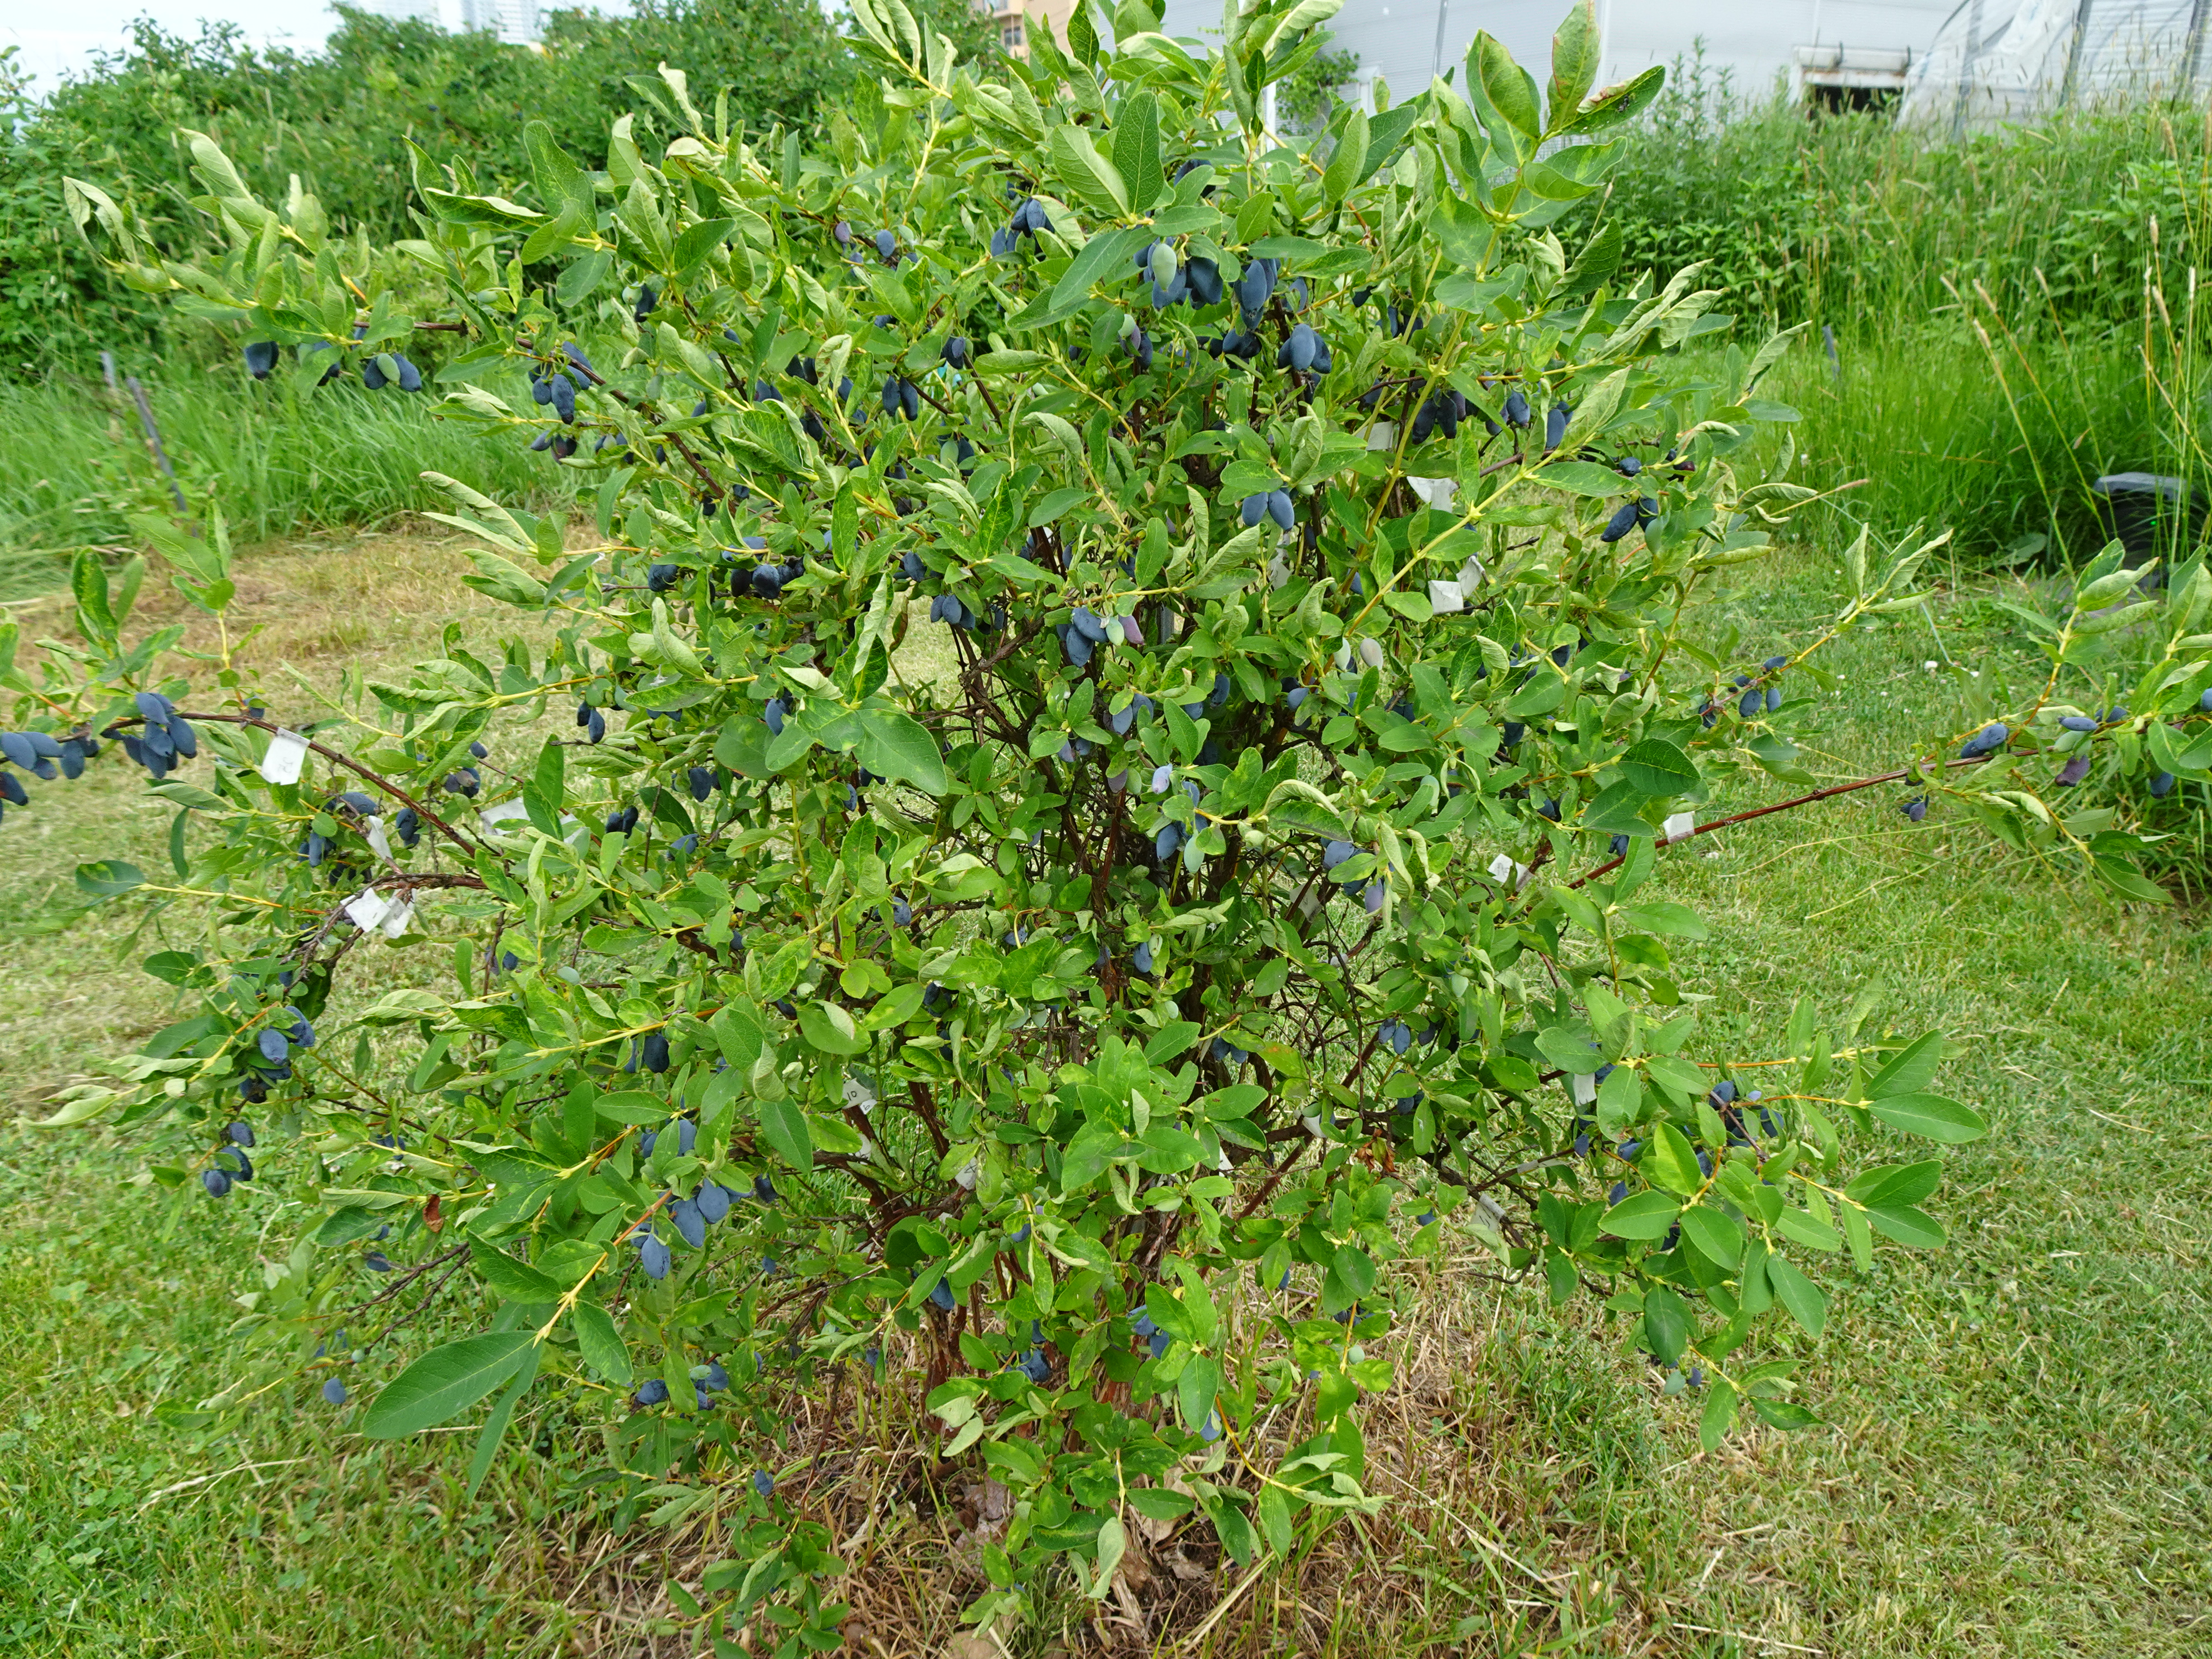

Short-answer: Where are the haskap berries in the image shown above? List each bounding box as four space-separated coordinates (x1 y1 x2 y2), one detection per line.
1033 382 1052 396
1762 656 1787 674
1552 643 1570 666
1193 815 1211 833
777 700 790 714
638 1380 665 1404
1102 1272 1116 1292
604 433 618 451
707 656 713 661
1438 396 1459 437
1107 766 1127 795
1280 678 1297 691
1608 842 1616 853
393 1136 404 1160
1447 770 1460 796
693 1380 706 1393
666 711 681 719
861 766 872 786
1610 1182 1629 1207
71 727 95 756
1760 1109 1785 1137
2151 771 2173 791
503 948 518 969
1153 268 1184 310
873 775 889 785
1120 318 1143 359
1595 1078 1606 1084
283 1112 301 1141
1507 391 1529 424
873 315 897 328
1239 305 1263 330
1128 767 1142 798
716 1056 730 1072
550 374 574 424
228 1122 255 1147
577 701 591 728
1419 1211 1441 1225
1767 689 1781 713
1127 1306 1154 1335
957 439 974 475
564 433 577 456
1725 1110 1743 1131
1097 947 1110 964
991 226 1006 254
301 1108 313 1125
1331 953 1352 967
1288 275 1311 312
1059 739 1080 766
1321 836 1332 845
1574 1134 1590 1156
1004 928 1027 945
1184 260 1194 288
728 1193 740 1203
754 1174 776 1202
761 1255 776 1275
456 1175 471 1186
1667 461 1695 482
922 981 942 1008
611 704 623 711
1617 835 1629 856
843 784 856 812
692 453 701 460
648 566 666 591
456 770 479 786
1510 660 1518 665
417 755 422 761
1464 803 1481 840
1478 667 1487 678
770 1587 777 1593
1620 1143 1642 1161
850 411 866 426
1619 671 1636 681
1189 288 1206 309
1546 408 1565 450
1240 490 1268 531
850 252 864 262
1203 740 1218 764
1302 522 1317 548
622 805 638 832
315 1347 325 1357
1905 778 1925 786
699 498 716 515
1345 420 1353 428
1196 323 1213 346
1014 1585 1025 1593
1224 352 1249 371
641 1128 652 1147
310 830 335 868
245 342 271 379
723 323 741 345
1394 1024 1410 1053
367 1260 392 1270
1557 402 1571 424
2073 737 2091 760
1289 323 1315 371
629 1218 657 1246
220 1170 231 1192
1239 332 1263 356
1011 197 1032 229
145 723 173 758
532 376 551 406
299 342 313 367
1205 419 1226 431
779 566 794 584
942 741 952 754
1360 638 1382 671
849 459 862 467
1684 1126 1691 1135
1064 934 1073 943
863 600 872 611
1146 211 1151 217
1645 516 1661 554
1960 742 1987 759
1023 229 1033 239
645 710 663 720
1046 1004 1062 1012
551 435 567 465
1244 831 1267 848
938 1029 952 1061
977 623 991 635
958 416 972 435
1001 1069 1011 1078
905 553 927 580
1580 626 1592 649
1189 254 1222 304
889 464 906 478
754 622 768 630
645 373 664 400
1406 377 1429 392
317 341 339 376
1337 712 1348 718
553 965 581 985
166 715 197 755
1418 1022 1435 1045
1600 501 1638 542
1103 710 1112 727
1412 400 1436 445
2 735 32 770
183 753 197 759
377 1135 384 1146
1030 1323 1046 1345
1152 243 1177 290
398 354 422 391
330 863 355 884
1148 243 1154 277
123 735 144 766
1486 406 1507 436
1203 1411 1222 1441
959 610 976 630
1468 1030 1480 1043
988 605 1004 631
691 1185 701 1201
259 1065 292 1080
1241 261 1268 314
1034 243 1047 261
1910 803 1926 822
1174 1123 1181 1130
778 999 800 1019
562 342 591 366
930 596 944 621
396 809 416 840
1081 417 1094 442
257 1073 276 1090
1747 1090 1762 1102
643 1031 669 1075
869 909 883 922
1260 259 1274 302
782 690 793 705
372 1252 387 1257
1309 678 1316 684
668 834 698 857
1444 392 1465 422
1148 934 1162 956
941 437 960 467
233 974 245 979
257 991 267 1002
1221 326 1249 352
1152 764 1173 793
241 1077 267 1104
1649 1354 1663 1366
658 1187 679 1213
721 537 771 560
1319 1111 1337 1125
383 1133 394 1148
595 435 609 456
800 418 809 432
1480 371 1496 389
1134 243 1149 268
1358 1308 1375 1317
1345 569 1366 594
1164 1001 1178 1019
900 379 921 421
644 1133 658 1159
838 376 856 400
674 767 689 794
1404 704 1414 719
624 1039 644 1074
1739 690 1762 717
344 789 379 815
980 1066 989 1085
1732 1122 1746 1136
792 481 801 488
1504 723 1518 734
487 946 504 977
1388 863 1394 871
1020 548 1029 560
1578 1106 1596 1129
2095 706 2130 722
698 1392 716 1410
867 1347 884 1365
1293 716 1311 731
931 571 942 575
1150 1331 1170 1360
531 430 552 451
1268 258 1278 286
2052 730 2087 753
564 366 591 389
287 1006 316 1047
1698 705 1716 727
1304 372 1320 402
60 738 83 779
1056 624 1071 639
1380 414 1390 421
1618 1136 1641 1152
1535 716 1556 734
1010 1005 1030 1029
1526 655 1538 677
1119 614 1145 646
470 742 488 758
1181 782 1200 812
1347 692 1355 706
2062 755 2093 781
842 243 855 250
1231 1044 1247 1063
1402 315 1424 338
1549 802 1563 822
1394 704 1403 713
314 374 329 385
878 229 895 255
666 1118 673 1125
1656 1223 1680 1251
740 488 749 498
364 361 385 390
589 708 605 744
151 693 177 713
377 353 400 380
1498 745 1507 756
1665 450 1684 468
690 769 710 801
202 1170 208 1185
1063 541 1074 568
1347 1312 1361 1326
1233 256 1253 301
1334 1311 1346 1321
1266 490 1296 534
215 1146 254 1181
2201 688 2212 710
1068 344 1078 360
1185 832 1208 875
1510 642 1522 659
1464 523 1476 533
731 568 749 597
1664 1357 1680 1369
1174 287 1191 305
1118 412 1132 434
1595 1063 1616 1081
1346 658 1357 673
867 447 876 462
1322 841 1356 867
1028 536 1034 546
298 842 309 862
1157 820 1180 859
617 432 634 465
1029 1204 1048 1216
755 1469 773 1495
269 341 280 369
33 758 59 782
796 559 804 576
765 700 790 735
1197 159 1216 197
477 291 497 304
1663 1372 1686 1396
1577 446 1605 462
662 565 677 582
930 1278 955 1311
1380 1018 1396 1042
1131 694 1152 728
1175 159 1195 185
1696 1152 1713 1176
710 771 721 791
1414 1091 1424 1108
462 768 480 794
752 565 779 598
677 1119 697 1156
242 696 265 719
1764 1181 1772 1186
1012 1221 1031 1244
813 531 834 553
1397 1097 1413 1114
1419 775 1439 803
1288 688 1310 707
1538 797 1555 816
1208 672 1230 710
769 387 785 405
939 424 956 445
1620 457 1642 475
1216 381 1229 390
945 339 966 368
807 412 823 438
1155 1197 1185 1211
709 580 716 605
1309 336 1331 374
1165 518 1178 534
1590 1042 1596 1048
906 250 918 264
1709 1081 1735 1111
352 327 367 349
1027 830 1044 848
1144 268 1151 282
679 1094 697 1120
893 897 912 925
843 640 849 646
1350 284 1370 308
1174 348 1191 371
881 374 901 417
445 775 459 793
374 1226 389 1240
925 908 933 919
841 647 848 655
893 571 909 579
1729 1088 1745 1108
1027 199 1043 232
1105 615 1124 646
1504 726 1524 746
1334 636 1352 671
911 498 921 511
1159 344 1173 354
1686 1367 1703 1387
655 446 667 462
260 1032 287 1060
634 287 657 323
623 283 642 305
1275 258 1281 270
1008 181 1016 199
135 693 170 723
1066 624 1092 667
1120 547 1140 575
323 1377 346 1403
1637 497 1658 530
1111 706 1132 735
833 221 850 241
1278 339 1291 368
1046 218 1054 232
140 740 168 780
729 931 747 949
1279 1270 1290 1289
1347 1346 1364 1365
1447 1032 1460 1054
603 810 625 839
101 729 124 740
1309 1369 1319 1379
1978 724 2008 750
943 594 962 624
614 685 640 711
952 341 966 358
1136 332 1153 373
898 499 910 514
1449 974 1469 996
803 357 818 387
0 773 27 805
697 1179 731 1226
205 1170 225 1198
640 1233 672 1281
1032 1006 1048 1028
718 1182 756 1198
898 225 914 240
1024 1349 1048 1381
754 379 772 402
1728 1138 1751 1147
1366 878 1384 911
1119 314 1139 336
527 348 550 383
1344 876 1368 894
679 607 690 631
1070 608 1108 644
672 1197 705 1249
1007 1365 1032 1382
353 1348 365 1362
1228 281 1234 289
1362 377 1386 407
1727 676 1751 693
1376 305 1398 338
167 749 178 771
847 617 856 638
1133 944 1151 974
1208 330 1228 359
34 733 61 758
1007 231 1016 252
2061 718 2098 730
1185 699 1207 720
708 1367 727 1389
785 354 802 380
691 402 706 417
405 826 421 850
733 484 741 495
1076 735 1095 759
1211 1039 1232 1061
1293 483 1316 495
1901 795 1928 812
1465 401 1473 416
1124 1126 1128 1132
300 922 313 936
279 971 293 987
756 1351 764 1370
689 1365 712 1381
734 773 744 780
